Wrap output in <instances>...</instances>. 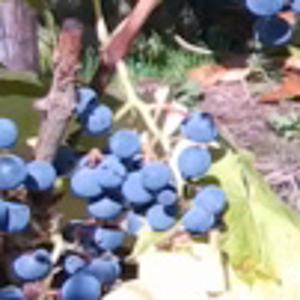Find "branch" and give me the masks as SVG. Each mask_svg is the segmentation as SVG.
<instances>
[{
	"instance_id": "30e6481e",
	"label": "branch",
	"mask_w": 300,
	"mask_h": 300,
	"mask_svg": "<svg viewBox=\"0 0 300 300\" xmlns=\"http://www.w3.org/2000/svg\"><path fill=\"white\" fill-rule=\"evenodd\" d=\"M86 0H66L62 27L46 90L34 154L46 163L56 159L72 110L78 106L77 72L82 56Z\"/></svg>"
},
{
	"instance_id": "325d2c04",
	"label": "branch",
	"mask_w": 300,
	"mask_h": 300,
	"mask_svg": "<svg viewBox=\"0 0 300 300\" xmlns=\"http://www.w3.org/2000/svg\"><path fill=\"white\" fill-rule=\"evenodd\" d=\"M161 3L162 0H139L126 18L117 25L113 35L102 45L97 56V72L92 76V88L95 92L105 91L117 63L133 39L139 37L144 23Z\"/></svg>"
}]
</instances>
